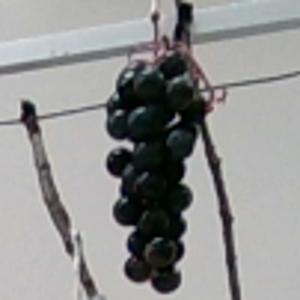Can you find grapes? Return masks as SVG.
<instances>
[{
	"mask_svg": "<svg viewBox=\"0 0 300 300\" xmlns=\"http://www.w3.org/2000/svg\"><path fill=\"white\" fill-rule=\"evenodd\" d=\"M191 67L189 55L176 48L166 49L155 62L130 60L105 101L109 137L134 144L133 151L114 146L105 160L109 176L122 180L113 218L136 229L125 241L131 257L124 274L134 284L149 280L161 295L182 282L175 265L185 254L179 239L188 223L180 213L190 207L193 194L177 182L186 176L184 159L199 137L195 123L209 113L206 97L195 93L198 80Z\"/></svg>",
	"mask_w": 300,
	"mask_h": 300,
	"instance_id": "obj_1",
	"label": "grapes"
}]
</instances>
